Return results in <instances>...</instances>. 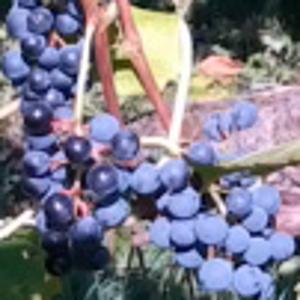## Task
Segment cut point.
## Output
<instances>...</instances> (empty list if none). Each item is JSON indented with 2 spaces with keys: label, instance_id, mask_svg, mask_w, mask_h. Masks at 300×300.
<instances>
[{
  "label": "cut point",
  "instance_id": "1",
  "mask_svg": "<svg viewBox=\"0 0 300 300\" xmlns=\"http://www.w3.org/2000/svg\"><path fill=\"white\" fill-rule=\"evenodd\" d=\"M94 36L95 23L93 21H88L86 23L85 36L80 50L78 73L75 80L74 106L72 115V125L74 127H79L81 125L84 84L87 77L88 59L94 41Z\"/></svg>",
  "mask_w": 300,
  "mask_h": 300
}]
</instances>
